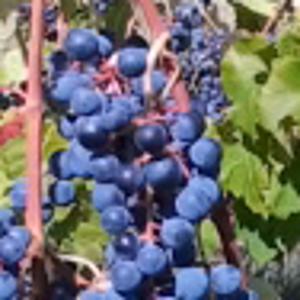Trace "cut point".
<instances>
[{"mask_svg":"<svg viewBox=\"0 0 300 300\" xmlns=\"http://www.w3.org/2000/svg\"><path fill=\"white\" fill-rule=\"evenodd\" d=\"M161 52L160 43L158 40H153V44L146 56L145 68H144V82L142 88V96L149 98L152 93L153 87V72L156 58Z\"/></svg>","mask_w":300,"mask_h":300,"instance_id":"1","label":"cut point"}]
</instances>
